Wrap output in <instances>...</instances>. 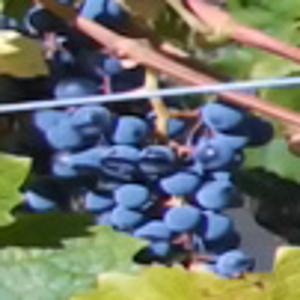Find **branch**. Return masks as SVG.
<instances>
[{"mask_svg": "<svg viewBox=\"0 0 300 300\" xmlns=\"http://www.w3.org/2000/svg\"><path fill=\"white\" fill-rule=\"evenodd\" d=\"M42 7L51 11L54 19L91 35L94 42L140 65L156 68L166 75L191 85H222L224 83L222 76L202 72L198 67L186 65L165 52L155 49L150 46L148 38L139 40L134 36L107 29L87 20L85 14L51 0H43Z\"/></svg>", "mask_w": 300, "mask_h": 300, "instance_id": "branch-1", "label": "branch"}, {"mask_svg": "<svg viewBox=\"0 0 300 300\" xmlns=\"http://www.w3.org/2000/svg\"><path fill=\"white\" fill-rule=\"evenodd\" d=\"M184 4L218 38L290 58L296 66H300V46L292 40L252 28L235 18L227 8L211 1L184 0Z\"/></svg>", "mask_w": 300, "mask_h": 300, "instance_id": "branch-2", "label": "branch"}, {"mask_svg": "<svg viewBox=\"0 0 300 300\" xmlns=\"http://www.w3.org/2000/svg\"><path fill=\"white\" fill-rule=\"evenodd\" d=\"M217 97L219 99L231 101L237 107L258 112L271 118H275L286 125L300 128V112L263 103L252 95L238 91L219 90L217 92Z\"/></svg>", "mask_w": 300, "mask_h": 300, "instance_id": "branch-3", "label": "branch"}]
</instances>
